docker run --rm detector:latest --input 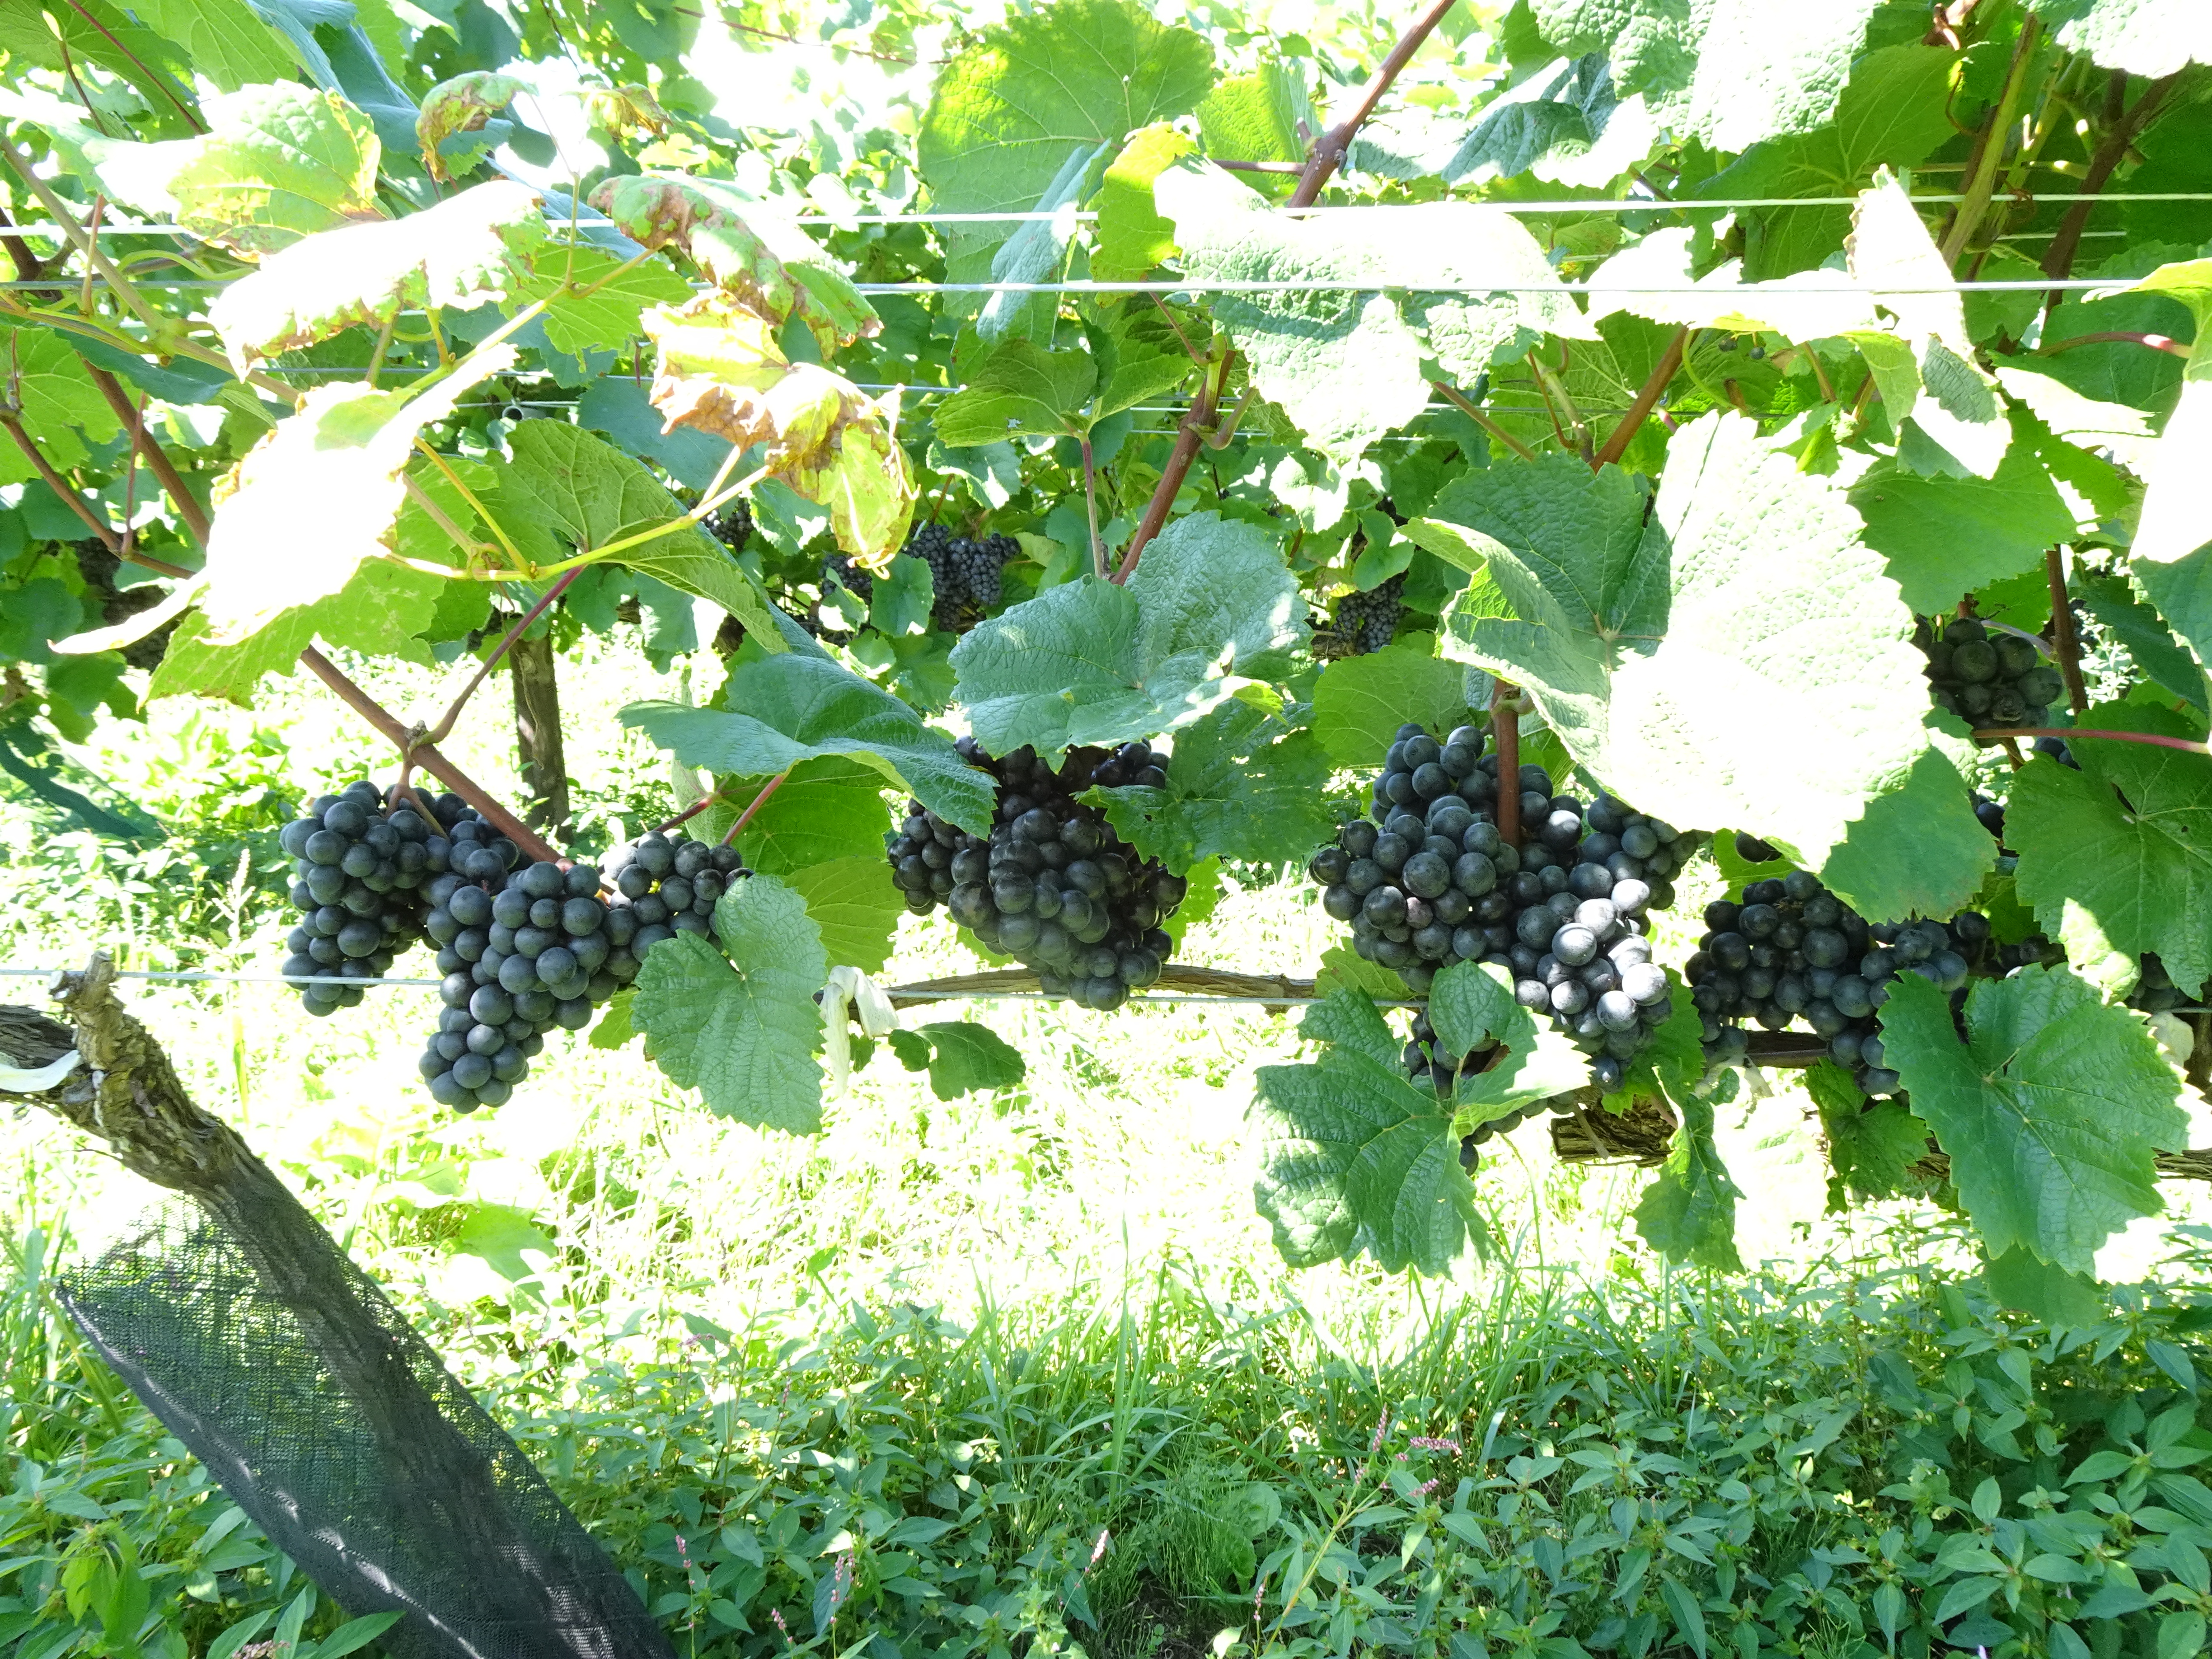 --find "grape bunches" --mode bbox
[1515,863,1664,1114]
[605,831,754,991]
[1684,880,1811,1030]
[2032,737,2082,770]
[1572,789,1712,911]
[1735,830,1782,863]
[1943,912,2068,971]
[1374,723,1582,849]
[279,780,468,1017]
[1092,737,1186,963]
[1679,984,1747,1067]
[888,736,1077,915]
[1310,808,1550,997]
[1967,790,2019,859]
[420,810,619,1113]
[948,793,1161,1011]
[1403,1007,1521,1177]
[1786,869,1967,1094]
[2123,950,2189,1011]
[1909,615,2063,748]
